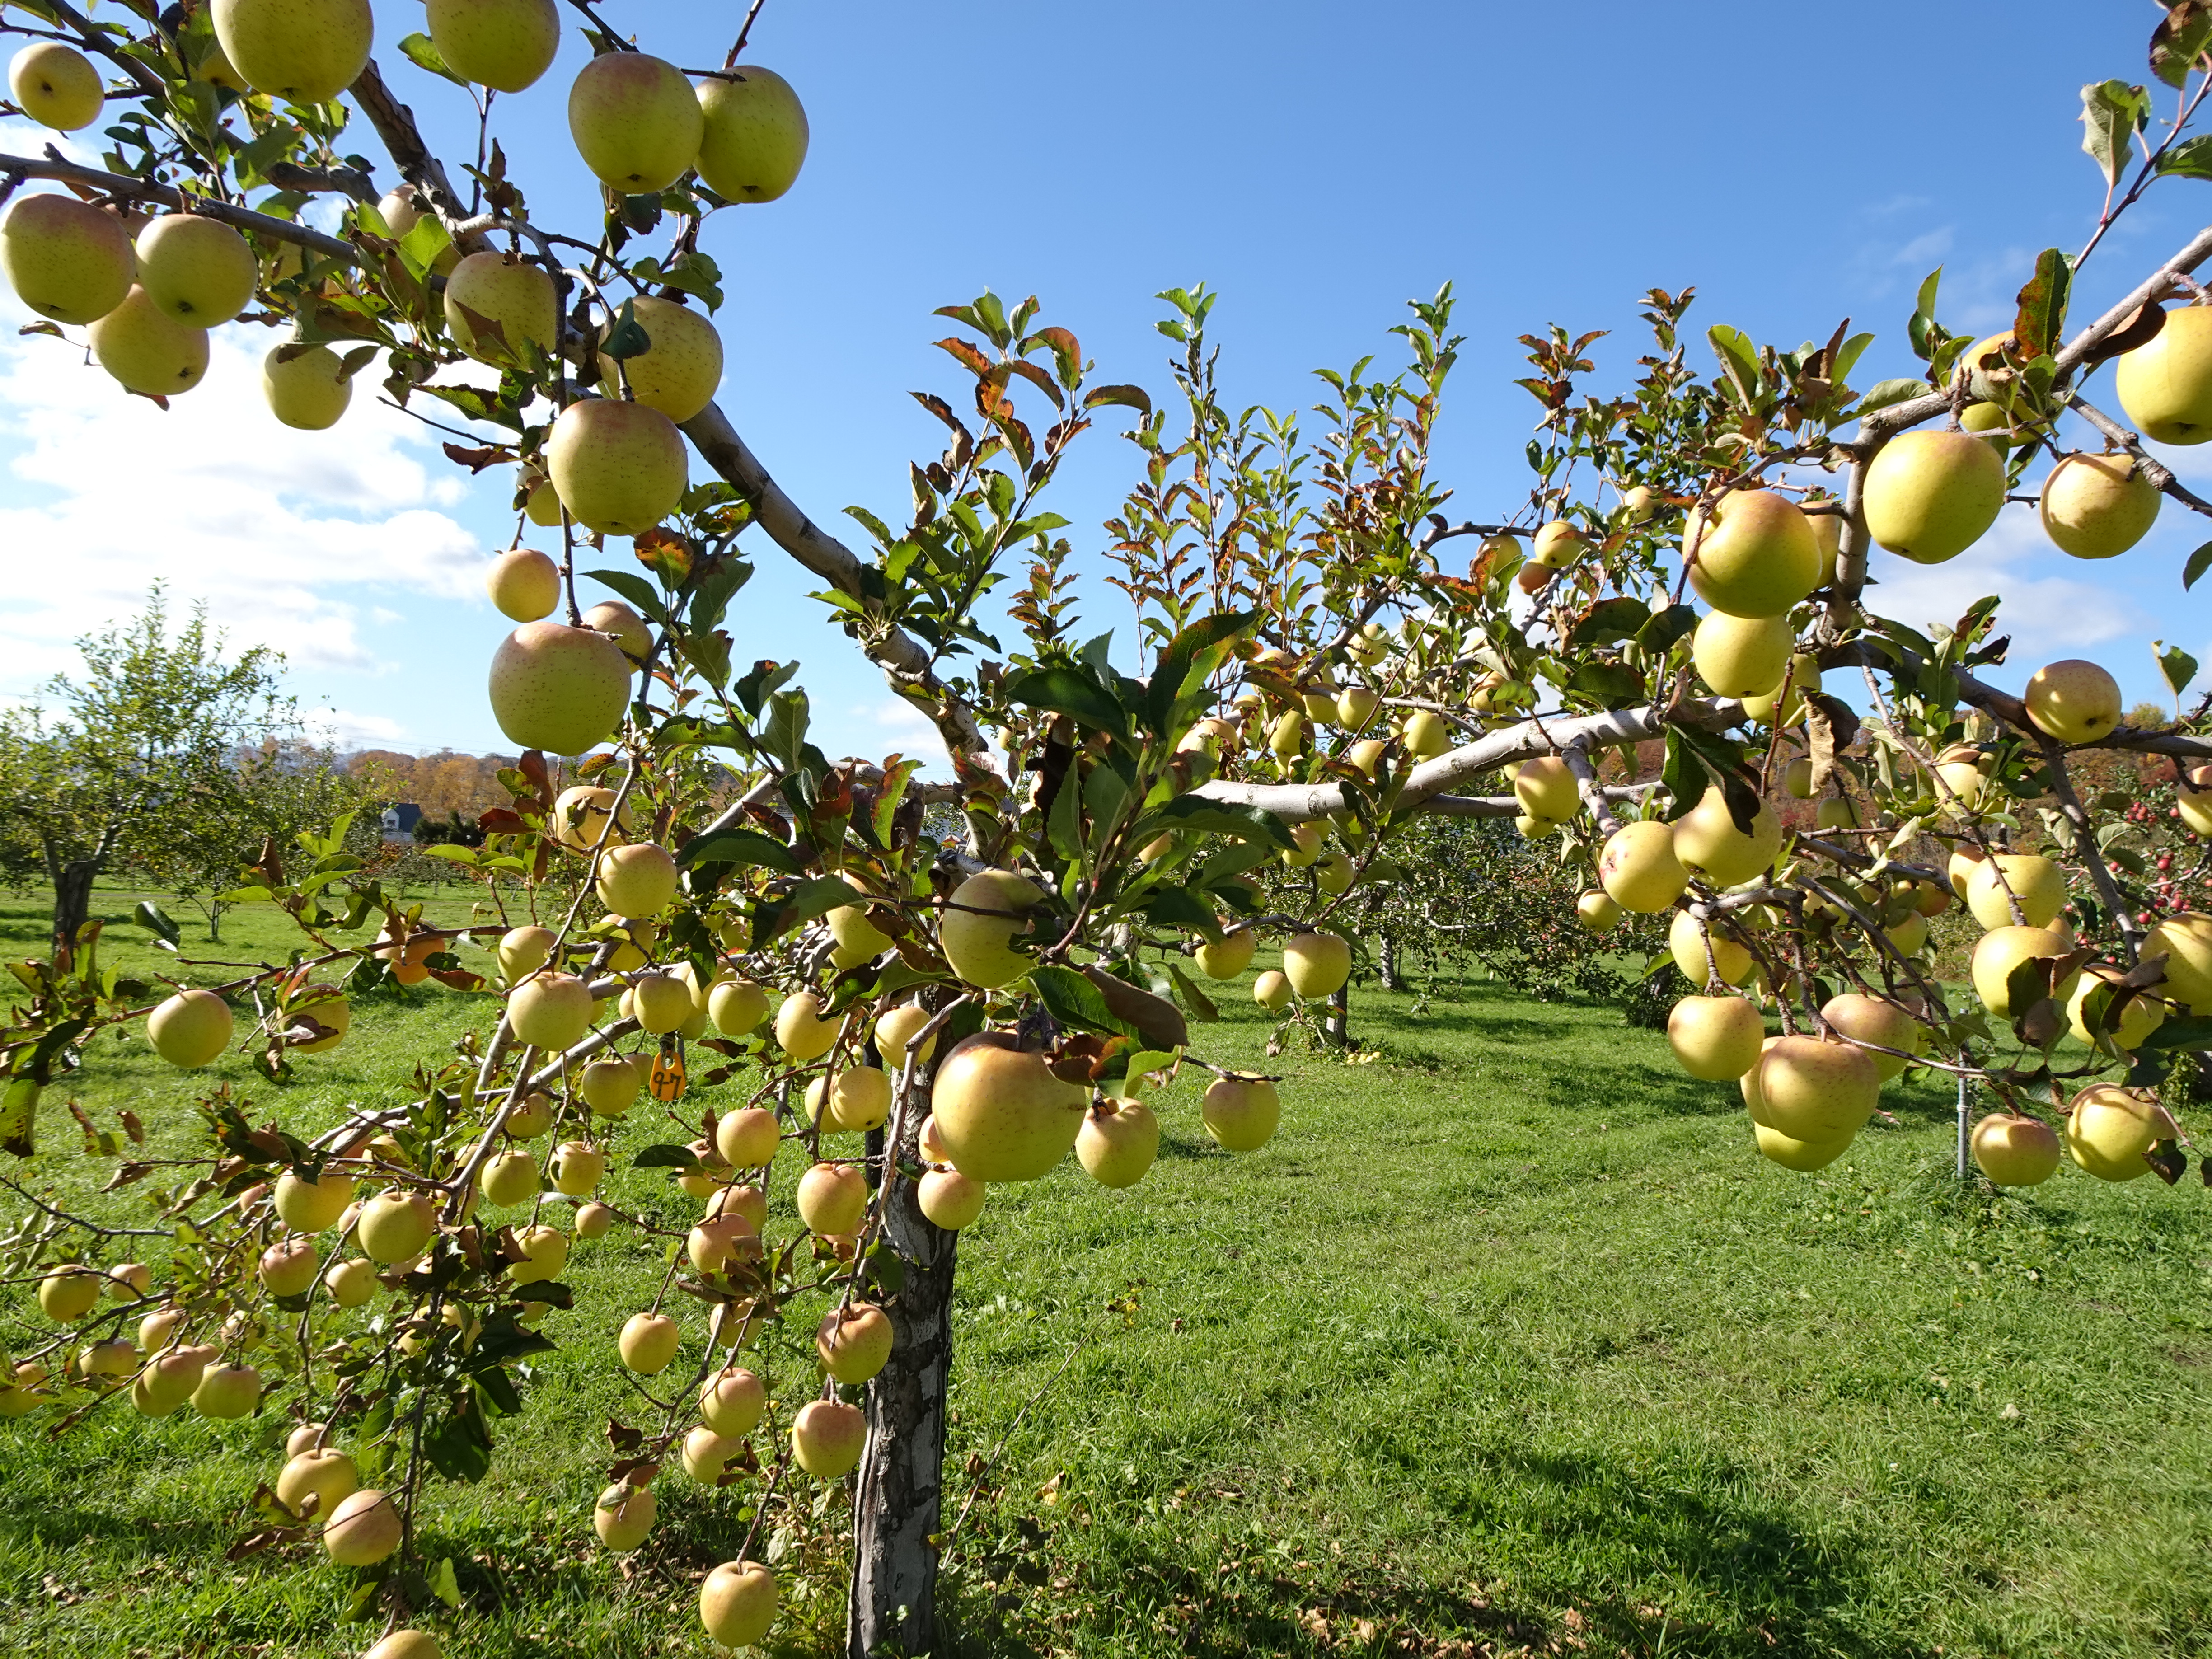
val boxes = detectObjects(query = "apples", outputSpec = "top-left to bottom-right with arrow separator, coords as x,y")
682,1425 -> 742,1484
1075,1097 -> 1159,1188
1881,909 -> 1927,959
531,1099 -> 554,1138
816,1303 -> 893,1384
1673,785 -> 1783,887
1599,821 -> 1690,913
1933,741 -> 2006,824
1295,813 -> 1332,842
1856,884 -> 1880,904
429,1181 -> 479,1223
8,41 -> 104,131
323,1489 -> 403,1566
824,1218 -> 870,1253
277,1448 -> 357,1523
239,1183 -> 272,1218
706,1185 -> 766,1236
1514,756 -> 1582,824
516,456 -> 578,527
1302,683 -> 1342,723
287,1422 -> 332,1459
1759,1035 -> 1880,1144
79,1339 -> 137,1385
134,214 -> 258,329
108,1264 -> 151,1301
454,1143 -> 500,1186
874,1006 -> 937,1069
1951,329 -> 2073,447
2139,910 -> 2212,1006
0,1362 -> 49,1416
633,976 -> 691,1034
1194,717 -> 1239,753
1307,665 -> 1336,687
259,1240 -> 318,1296
147,990 -> 232,1068
131,1373 -> 181,1418
508,972 -> 594,1051
679,1013 -> 707,1040
1471,673 -> 1516,718
716,1108 -> 780,1169
389,1254 -> 425,1275
1389,713 -> 1414,738
594,1483 -> 657,1550
581,1060 -> 640,1114
1267,710 -> 1314,756
1202,1071 -> 1279,1151
206,1364 -> 260,1419
699,1367 -> 765,1439
829,945 -> 874,970
1337,688 -> 1381,733
1416,736 -> 1454,764
1477,535 -> 1522,577
829,1066 -> 892,1131
692,65 -> 808,203
220,1310 -> 267,1353
329,1128 -> 373,1168
1503,759 -> 1530,781
485,549 -> 561,623
1288,751 -> 1329,784
918,1114 -> 950,1164
776,992 -> 841,1059
209,0 -> 375,104
1971,1112 -> 2060,1186
1752,1121 -> 1856,1173
1890,867 -> 1951,917
39,1264 -> 100,1322
1516,815 -> 1555,839
2116,306 -> 2212,445
589,999 -> 606,1024
686,956 -> 742,1014
86,283 -> 209,395
408,1304 -> 463,1334
1948,840 -> 2004,903
804,1074 -> 849,1134
262,342 -> 353,430
377,182 -> 463,276
547,398 -> 688,535
1682,486 -> 1823,619
1970,925 -> 2081,1020
0,192 -> 136,325
699,1560 -> 778,1647
375,917 -> 444,984
1348,623 -> 1390,666
1754,974 -> 1801,1006
2064,1082 -> 2177,1182
462,1319 -> 480,1354
1177,729 -> 1210,753
481,1150 -> 538,1207
1193,915 -> 1255,980
1281,828 -> 1322,867
396,1329 -> 434,1362
791,1400 -> 867,1477
1402,712 -> 1446,755
575,1204 -> 611,1239
675,1139 -> 734,1197
1231,695 -> 1260,712
1740,1036 -> 1787,1129
826,870 -> 900,956
1741,653 -> 1822,728
1785,758 -> 1813,799
274,1162 -> 352,1233
797,1163 -> 867,1236
552,785 -> 633,858
931,1032 -> 1085,1182
414,1256 -> 464,1304
358,1192 -> 435,1263
579,599 -> 654,675
138,1310 -> 190,1357
325,1258 -> 377,1308
505,1225 -> 568,1285
189,1361 -> 236,1417
337,1201 -> 368,1250
514,1299 -> 548,1323
1284,933 -> 1351,998
718,916 -> 751,950
1817,797 -> 1861,838
193,1343 -> 221,1366
687,1213 -> 756,1274
1027,770 -> 1049,811
167,48 -> 250,92
143,1344 -> 203,1404
1863,430 -> 2006,563
710,1297 -> 763,1349
158,1299 -> 179,1310
1534,520 -> 1582,568
1802,888 -> 1849,926
1518,558 -> 1553,595
708,980 -> 765,1035
1668,995 -> 1764,1081
599,914 -> 654,972
497,926 -> 564,987
2162,995 -> 2212,1019
1138,832 -> 1173,865
488,620 -> 631,757
1254,970 -> 1294,1010
2067,963 -> 2164,1053
1621,485 -> 1655,523
1693,609 -> 1794,699
1798,499 -> 1844,590
1815,993 -> 1918,1084
2024,660 -> 2121,743
568,52 -> 704,193
547,1048 -> 582,1073
2039,452 -> 2161,558
2044,917 -> 2075,948
362,1135 -> 410,1187
619,985 -> 637,1019
548,1141 -> 603,1195
1578,889 -> 1622,931
596,843 -> 677,919
1480,709 -> 1521,732
941,870 -> 1047,989
1315,852 -> 1355,894
1967,854 -> 2065,932
1274,753 -> 1293,779
1237,837 -> 1285,865
101,203 -> 154,283
1250,649 -> 1296,695
597,296 -> 723,423
619,1313 -> 679,1374
444,251 -> 556,363
918,1160 -> 985,1230
425,0 -> 561,93
535,1087 -> 552,1103
363,1629 -> 444,1659
624,1052 -> 654,1086
499,1094 -> 547,1137
1669,903 -> 1760,987
278,984 -> 350,1053
2177,765 -> 2212,839
1350,740 -> 1387,778
998,717 -> 1036,750
667,960 -> 703,1018
261,239 -> 330,312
